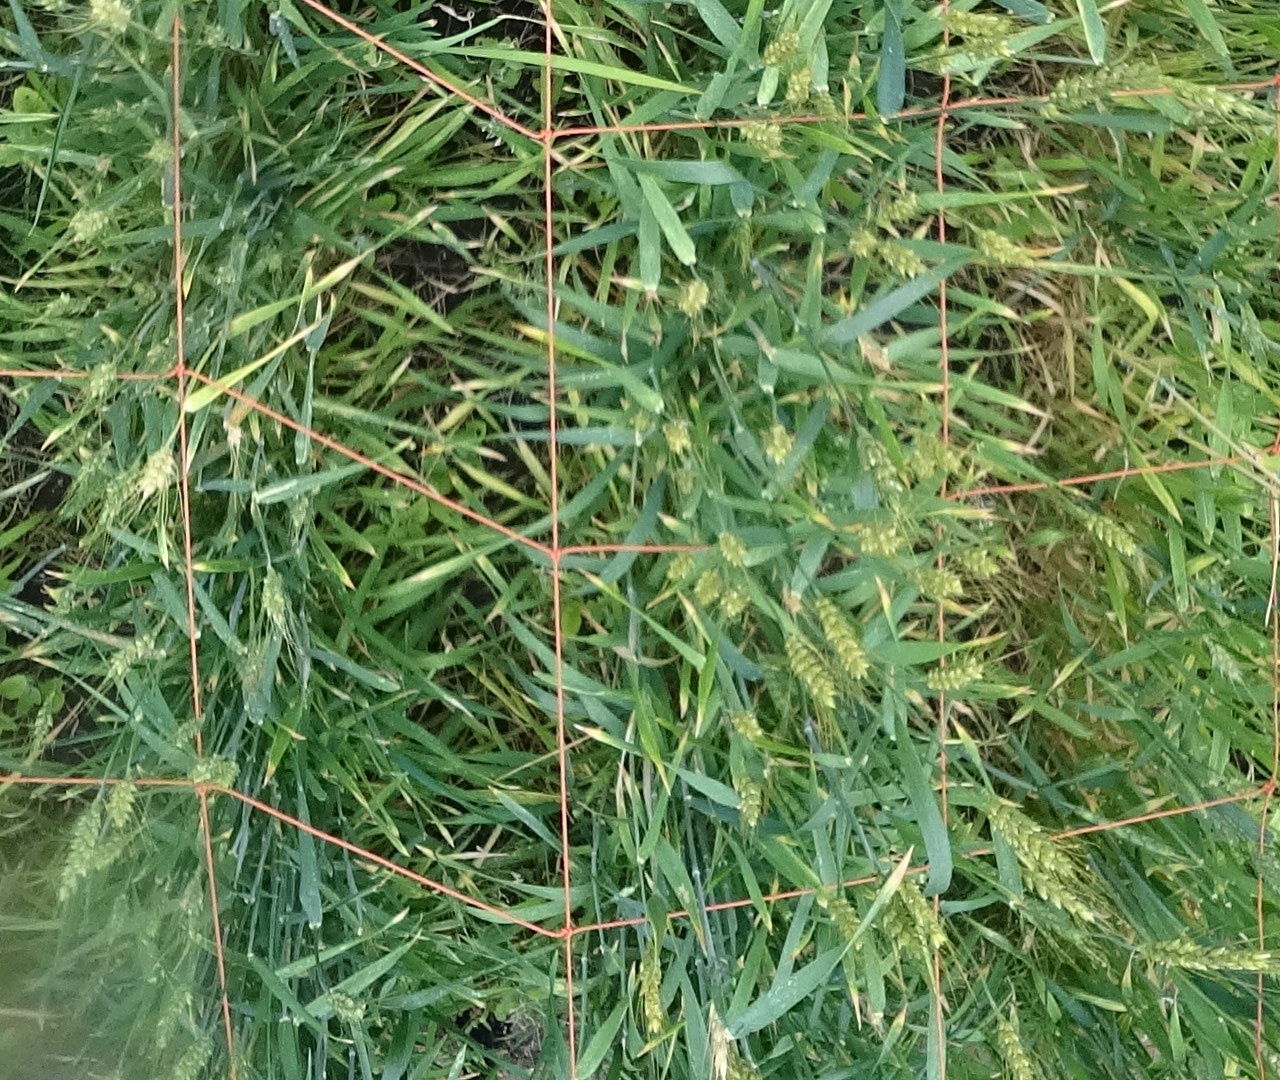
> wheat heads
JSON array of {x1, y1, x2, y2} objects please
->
[
  {"x1": 845, "y1": 226, "x2": 875, "y2": 252},
  {"x1": 51, "y1": 809, "x2": 100, "y2": 900},
  {"x1": 76, "y1": 205, "x2": 108, "y2": 242},
  {"x1": 755, "y1": 27, "x2": 797, "y2": 67},
  {"x1": 920, "y1": 424, "x2": 959, "y2": 474},
  {"x1": 39, "y1": 289, "x2": 88, "y2": 322},
  {"x1": 926, "y1": 659, "x2": 981, "y2": 690},
  {"x1": 81, "y1": 0, "x2": 133, "y2": 30},
  {"x1": 26, "y1": 701, "x2": 59, "y2": 747},
  {"x1": 716, "y1": 528, "x2": 748, "y2": 568},
  {"x1": 878, "y1": 191, "x2": 927, "y2": 225},
  {"x1": 262, "y1": 571, "x2": 287, "y2": 631},
  {"x1": 817, "y1": 87, "x2": 845, "y2": 119},
  {"x1": 1154, "y1": 71, "x2": 1264, "y2": 121},
  {"x1": 154, "y1": 983, "x2": 199, "y2": 1043},
  {"x1": 110, "y1": 780, "x2": 136, "y2": 822},
  {"x1": 787, "y1": 630, "x2": 837, "y2": 714},
  {"x1": 785, "y1": 59, "x2": 812, "y2": 107},
  {"x1": 947, "y1": 5, "x2": 1017, "y2": 38},
  {"x1": 1136, "y1": 944, "x2": 1280, "y2": 970},
  {"x1": 897, "y1": 868, "x2": 950, "y2": 942},
  {"x1": 242, "y1": 642, "x2": 262, "y2": 702},
  {"x1": 1029, "y1": 874, "x2": 1109, "y2": 929},
  {"x1": 320, "y1": 988, "x2": 365, "y2": 1026},
  {"x1": 662, "y1": 550, "x2": 699, "y2": 580},
  {"x1": 737, "y1": 117, "x2": 779, "y2": 150},
  {"x1": 212, "y1": 759, "x2": 242, "y2": 793},
  {"x1": 58, "y1": 584, "x2": 83, "y2": 612},
  {"x1": 104, "y1": 474, "x2": 144, "y2": 517},
  {"x1": 172, "y1": 1039, "x2": 214, "y2": 1077},
  {"x1": 736, "y1": 754, "x2": 759, "y2": 826},
  {"x1": 703, "y1": 998, "x2": 734, "y2": 1062},
  {"x1": 145, "y1": 140, "x2": 172, "y2": 162},
  {"x1": 874, "y1": 237, "x2": 938, "y2": 272},
  {"x1": 979, "y1": 791, "x2": 1071, "y2": 875},
  {"x1": 169, "y1": 713, "x2": 205, "y2": 747},
  {"x1": 872, "y1": 889, "x2": 909, "y2": 953},
  {"x1": 192, "y1": 759, "x2": 209, "y2": 785},
  {"x1": 1053, "y1": 66, "x2": 1157, "y2": 108},
  {"x1": 814, "y1": 589, "x2": 866, "y2": 684},
  {"x1": 823, "y1": 887, "x2": 865, "y2": 947},
  {"x1": 104, "y1": 635, "x2": 151, "y2": 682},
  {"x1": 1209, "y1": 637, "x2": 1241, "y2": 682},
  {"x1": 87, "y1": 106, "x2": 114, "y2": 119},
  {"x1": 849, "y1": 416, "x2": 907, "y2": 497},
  {"x1": 753, "y1": 648, "x2": 785, "y2": 711},
  {"x1": 673, "y1": 273, "x2": 715, "y2": 321},
  {"x1": 203, "y1": 15, "x2": 227, "y2": 47},
  {"x1": 142, "y1": 886, "x2": 167, "y2": 938},
  {"x1": 636, "y1": 958, "x2": 671, "y2": 1029},
  {"x1": 977, "y1": 225, "x2": 1028, "y2": 266},
  {"x1": 955, "y1": 544, "x2": 1003, "y2": 584},
  {"x1": 732, "y1": 702, "x2": 761, "y2": 739},
  {"x1": 112, "y1": 892, "x2": 132, "y2": 932},
  {"x1": 90, "y1": 363, "x2": 118, "y2": 396},
  {"x1": 993, "y1": 1016, "x2": 1035, "y2": 1080},
  {"x1": 911, "y1": 563, "x2": 959, "y2": 593},
  {"x1": 1077, "y1": 805, "x2": 1182, "y2": 857},
  {"x1": 178, "y1": 879, "x2": 206, "y2": 926},
  {"x1": 833, "y1": 517, "x2": 902, "y2": 556},
  {"x1": 858, "y1": 332, "x2": 894, "y2": 377},
  {"x1": 767, "y1": 424, "x2": 793, "y2": 460},
  {"x1": 970, "y1": 33, "x2": 1017, "y2": 64},
  {"x1": 733, "y1": 217, "x2": 762, "y2": 264},
  {"x1": 658, "y1": 410, "x2": 699, "y2": 452},
  {"x1": 695, "y1": 565, "x2": 719, "y2": 603},
  {"x1": 721, "y1": 581, "x2": 750, "y2": 613},
  {"x1": 1082, "y1": 506, "x2": 1140, "y2": 560},
  {"x1": 103, "y1": 834, "x2": 133, "y2": 868},
  {"x1": 80, "y1": 439, "x2": 111, "y2": 478},
  {"x1": 146, "y1": 446, "x2": 180, "y2": 500}
]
